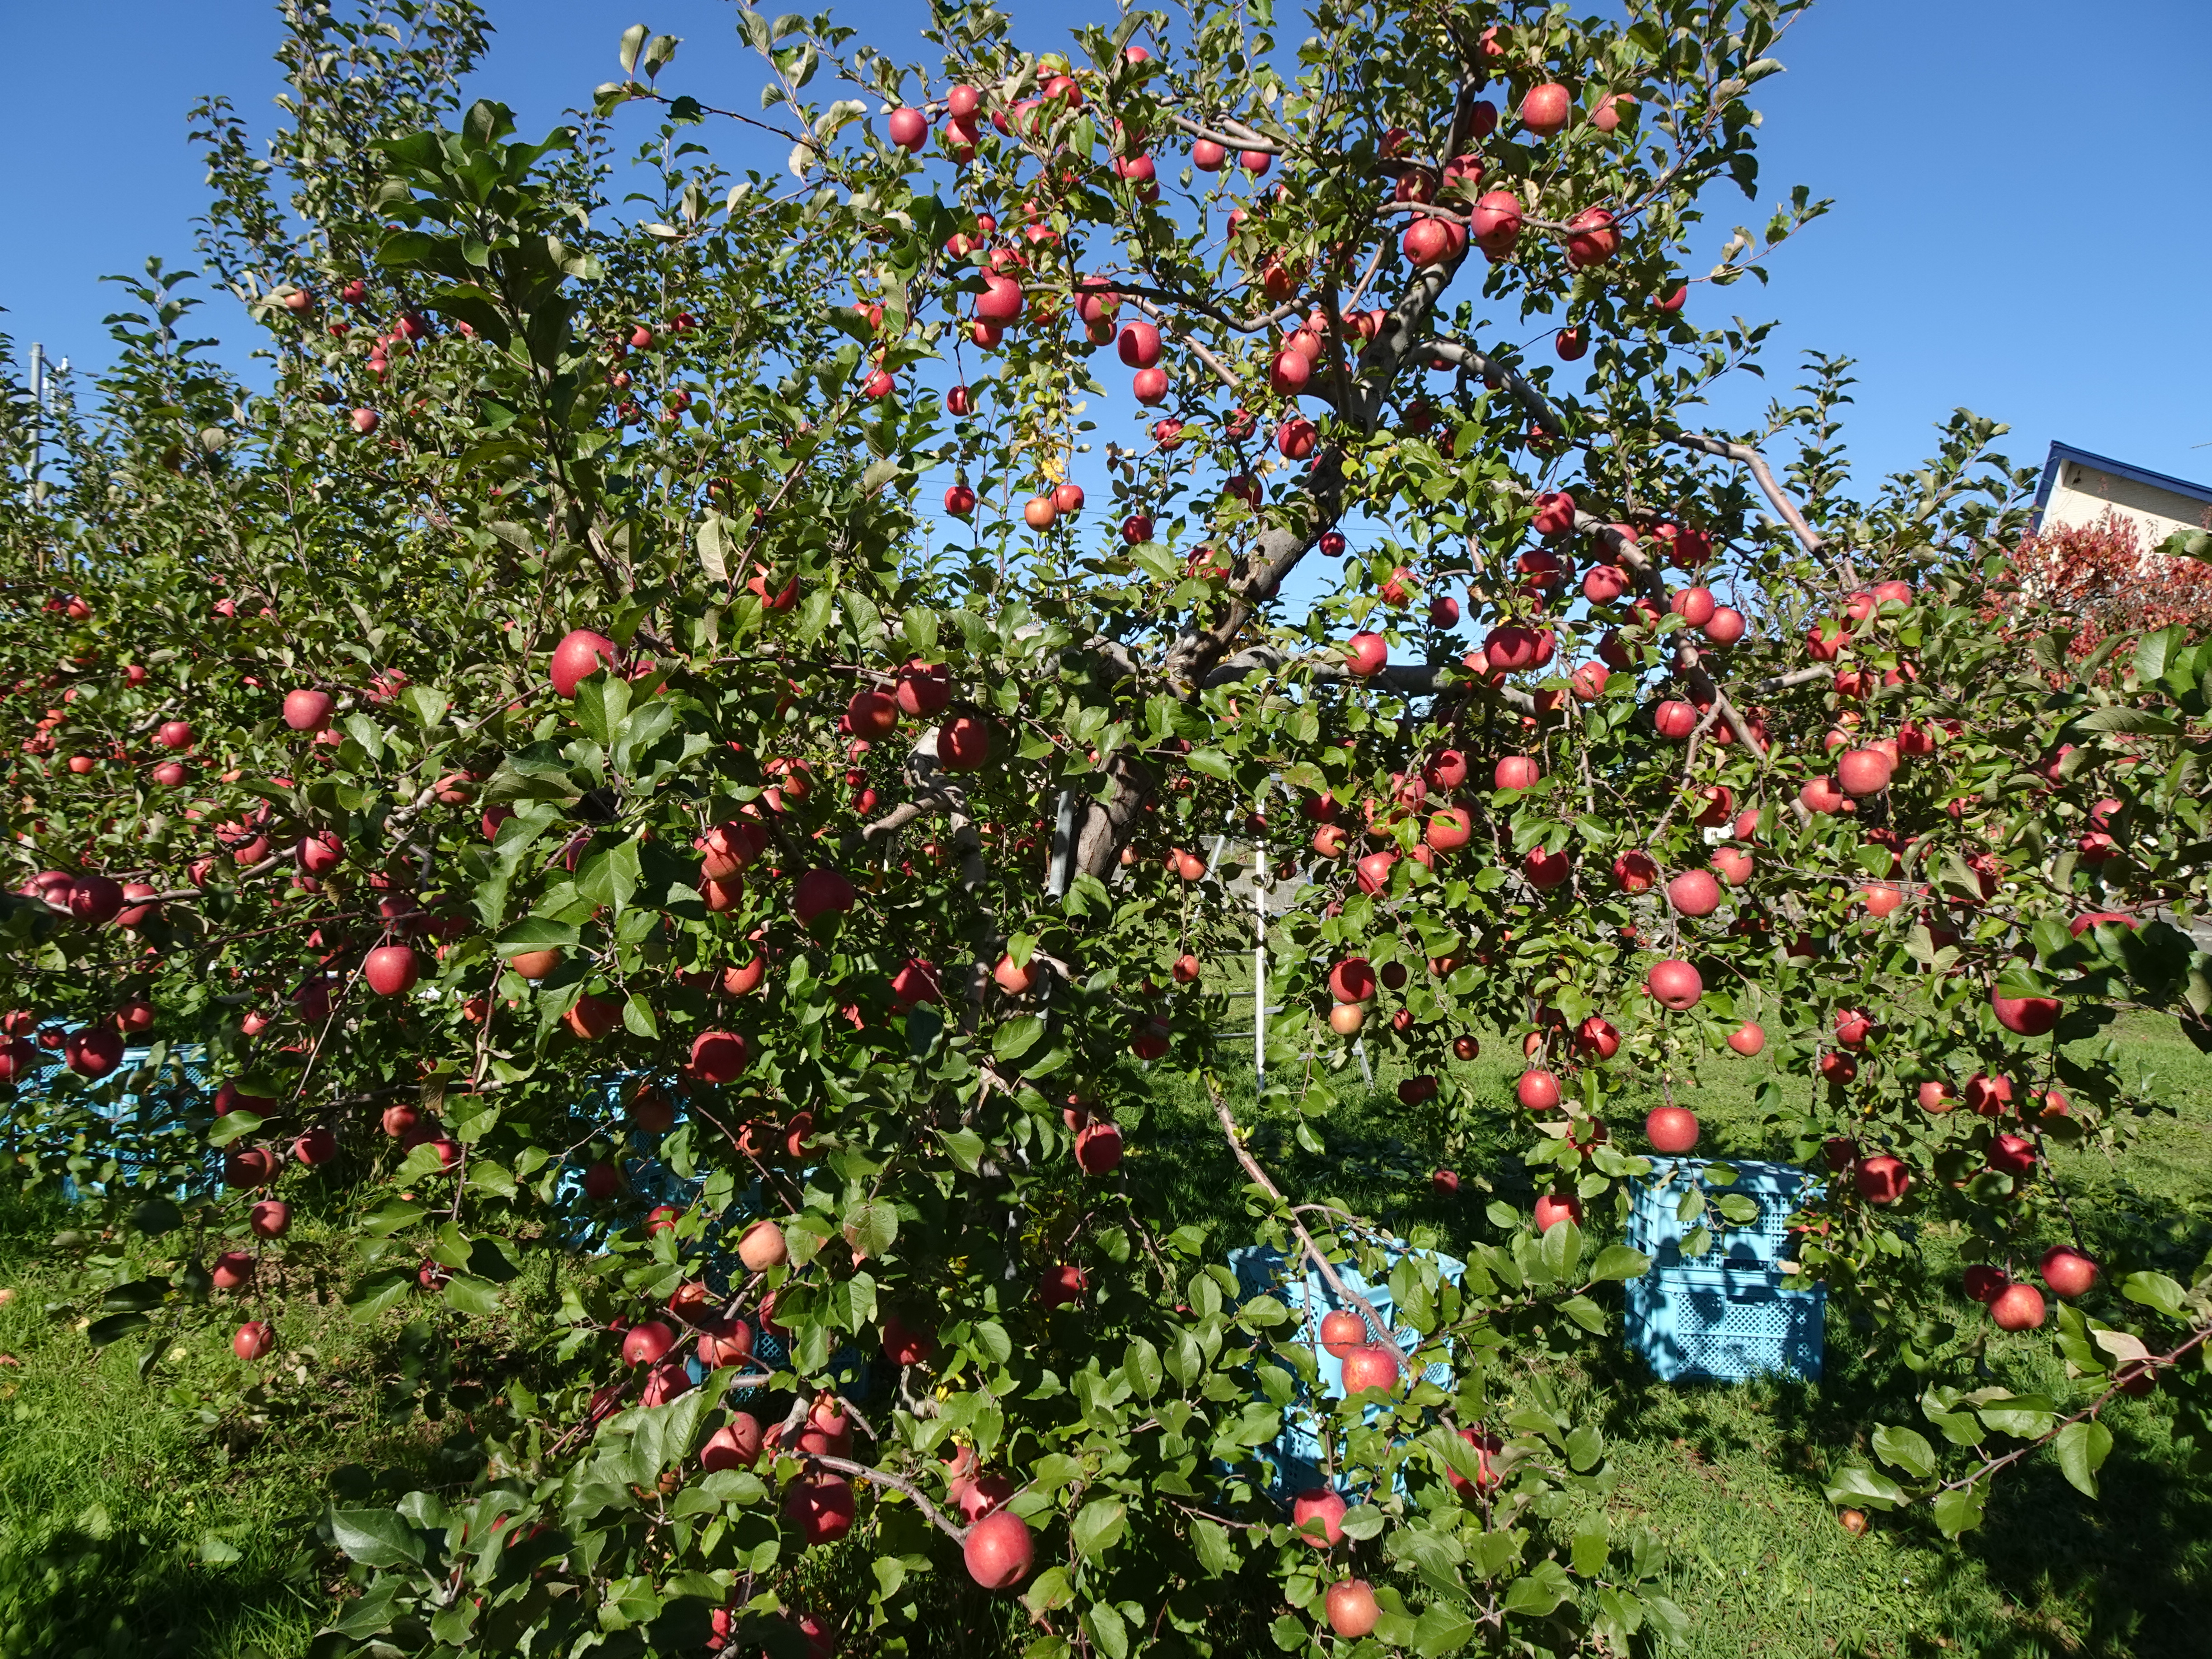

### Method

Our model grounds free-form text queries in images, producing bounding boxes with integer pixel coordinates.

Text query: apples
[1225,409,1256,440]
[1027,296,1060,327]
[462,1515,507,1547]
[234,1321,273,1360]
[773,678,803,714]
[1261,257,1302,301]
[1075,1124,1123,1175]
[637,1100,673,1134]
[279,1046,308,1056]
[292,876,321,918]
[1839,796,1855,815]
[1042,753,1052,766]
[1671,587,1715,628]
[1333,738,1356,748]
[945,486,975,515]
[1933,1166,1978,1187]
[1310,363,1321,374]
[1041,168,1080,206]
[567,838,590,873]
[422,894,470,939]
[1668,869,1719,917]
[509,1527,549,1576]
[1918,1080,1956,1115]
[1311,455,1322,473]
[867,224,889,243]
[1621,923,1637,938]
[1884,661,1916,687]
[1600,629,1644,668]
[1264,246,1286,260]
[1834,592,1878,635]
[2015,1089,2068,1133]
[747,561,799,615]
[1452,799,1477,822]
[1357,344,1368,358]
[1533,688,1564,716]
[1320,1310,1367,1359]
[1187,548,1230,583]
[1025,225,1060,259]
[416,1058,437,1080]
[589,1386,624,1429]
[24,871,78,918]
[2041,746,2075,789]
[1828,893,1851,920]
[761,1421,830,1473]
[1325,253,1355,281]
[250,1201,291,1239]
[224,1149,267,1189]
[2068,913,2140,975]
[383,1104,420,1137]
[900,860,913,877]
[937,718,988,773]
[1496,825,1513,847]
[378,896,416,935]
[2090,798,2131,834]
[116,884,161,930]
[1380,961,1407,990]
[1193,138,1225,172]
[69,875,124,924]
[738,1221,787,1273]
[1787,932,1820,959]
[1179,854,1207,881]
[117,1002,154,1033]
[1270,351,1310,395]
[762,757,812,804]
[1329,957,1376,1005]
[1884,844,1906,878]
[729,807,768,857]
[1484,627,1532,673]
[638,1364,691,1408]
[945,118,979,163]
[1087,750,1099,764]
[1651,523,1678,555]
[1640,984,1651,999]
[1304,791,1341,823]
[302,1037,317,1054]
[1126,46,1150,87]
[1430,360,1457,371]
[1277,184,1285,202]
[806,1395,850,1443]
[1341,1343,1398,1396]
[1379,128,1413,158]
[722,740,744,752]
[1476,952,1495,967]
[759,786,784,825]
[1613,850,1658,896]
[889,108,928,153]
[623,1321,675,1369]
[1806,625,1843,662]
[891,958,939,1005]
[994,954,1038,995]
[1991,983,2063,1036]
[810,827,828,839]
[1987,824,2005,838]
[1838,749,1891,797]
[1175,739,1191,759]
[1522,83,1570,136]
[296,1129,335,1165]
[895,658,953,719]
[1313,824,1349,859]
[1512,586,1543,620]
[852,789,878,816]
[700,1412,762,1474]
[1691,691,1712,715]
[1391,771,1427,815]
[1133,368,1168,405]
[1175,1305,1197,1317]
[1648,960,1702,1010]
[1613,564,1632,593]
[705,1570,743,1650]
[1495,756,1539,798]
[1822,1137,1861,1172]
[1706,712,1737,747]
[635,1467,679,1500]
[660,910,671,931]
[1964,1264,2006,1302]
[724,912,739,920]
[1836,1033,1868,1052]
[1041,76,1082,122]
[960,1475,1014,1527]
[1729,919,1751,938]
[300,1088,307,1095]
[1535,1004,1566,1032]
[1822,1052,1857,1085]
[1240,150,1271,177]
[1462,651,1506,692]
[1344,630,1387,677]
[1014,100,1054,137]
[1576,1018,1620,1062]
[185,798,220,834]
[1433,216,1466,261]
[992,99,1021,137]
[365,946,418,996]
[255,1147,279,1183]
[976,213,996,238]
[311,729,344,762]
[1172,955,1200,982]
[1593,524,1638,567]
[213,1252,254,1288]
[947,386,974,416]
[261,778,294,806]
[464,998,495,1024]
[1921,963,1957,981]
[215,1074,277,1120]
[963,1510,1034,1589]
[627,660,668,696]
[451,1563,468,1588]
[1522,624,1555,670]
[38,1028,67,1050]
[1834,662,1876,701]
[1593,91,1635,132]
[1864,827,1897,846]
[642,829,657,843]
[1624,599,1661,633]
[2031,784,2055,795]
[590,905,601,921]
[294,976,343,1023]
[1268,581,1280,597]
[1359,798,1400,839]
[1921,920,1955,955]
[1299,258,1313,278]
[1427,808,1471,854]
[510,949,561,980]
[1145,797,1157,812]
[65,1027,124,1079]
[1484,378,1501,389]
[1787,762,1803,778]
[1051,485,1084,514]
[1988,1284,2044,1332]
[1301,309,1328,349]
[852,303,878,317]
[1369,309,1388,337]
[1468,101,1497,139]
[1710,847,1753,887]
[735,1119,771,1157]
[594,990,645,1025]
[1114,152,1155,195]
[785,1472,855,1546]
[472,1596,482,1624]
[1173,776,1191,789]
[1325,1579,1380,1638]
[240,1010,270,1036]
[1406,401,1433,433]
[269,882,282,908]
[201,741,220,769]
[845,767,867,788]
[1863,931,1876,936]
[747,929,782,967]
[838,714,854,736]
[1453,1035,1479,1061]
[2040,1244,2097,1297]
[1024,497,1056,532]
[1566,251,1584,274]
[550,629,631,700]
[1834,1008,1872,1045]
[1525,845,1569,890]
[1940,718,1965,759]
[786,1112,827,1160]
[1520,716,1537,733]
[1689,784,1732,827]
[669,646,690,661]
[2113,736,2141,765]
[461,1079,483,1096]
[1131,1014,1171,1060]
[608,1315,630,1333]
[874,353,902,373]
[1393,1008,1415,1031]
[1284,328,1324,367]
[1156,419,1184,450]
[1447,1428,1504,1498]
[1583,565,1622,607]
[87,1020,95,1024]
[1015,836,1037,861]
[234,835,270,866]
[1227,238,1249,262]
[976,276,1023,329]
[1516,551,1560,589]
[848,692,899,742]
[1123,515,1153,545]
[1227,207,1266,240]
[1843,633,1853,646]
[1423,749,1467,792]
[1917,886,1931,919]
[498,994,519,1008]
[1864,738,1902,774]
[1326,901,1343,919]
[1897,719,1937,756]
[1117,322,1161,369]
[971,316,1003,350]
[103,1012,123,1033]
[1052,734,1064,745]
[1040,1266,1087,1312]
[436,769,475,805]
[1064,1094,1095,1134]
[981,249,1019,281]
[883,1316,934,1366]
[5,875,35,894]
[692,1031,747,1084]
[221,769,242,783]
[669,1281,710,1326]
[759,1290,790,1337]
[980,822,1005,848]
[308,928,353,971]
[1112,116,1146,151]
[1034,819,1046,832]
[1136,180,1160,204]
[419,1256,455,1290]
[676,965,713,994]
[1223,475,1263,513]
[1356,852,1397,900]
[1037,63,1062,91]
[1904,836,1932,860]
[866,665,902,709]
[1245,813,1267,835]
[283,689,334,732]
[1570,661,1610,703]
[1860,882,1902,918]
[1837,710,1861,727]
[1646,1107,1698,1153]
[1398,1079,1426,1107]
[1075,277,1120,325]
[1277,861,1296,881]
[1019,197,1047,225]
[1377,566,1419,608]
[1325,361,1352,375]
[1869,580,1912,607]
[1748,716,1763,743]
[1757,730,1774,754]
[368,668,413,710]
[1669,529,1712,570]
[216,813,255,843]
[1319,532,1345,557]
[1019,692,1030,703]
[1294,1488,1347,1548]
[153,761,187,789]
[496,693,525,723]
[1566,207,1621,267]
[436,944,452,961]
[1567,556,1576,579]
[1966,852,2008,908]
[819,1428,853,1473]
[1988,1134,2036,1170]
[920,843,948,867]
[1563,1044,1578,1072]
[1330,1004,1363,1035]
[1438,429,1455,460]
[627,1084,652,1114]
[1502,930,1513,951]
[1535,1194,1582,1233]
[1653,284,1686,312]
[473,772,492,782]
[1085,322,1117,346]
[869,307,883,330]
[1655,700,1696,738]
[0,1035,36,1084]
[1470,191,1522,247]
[1413,1075,1437,1097]
[1142,976,1160,999]
[1443,154,1486,203]
[1555,328,1588,361]
[1854,1155,1909,1203]
[1531,492,1575,536]
[1278,420,1316,460]
[256,804,301,847]
[1789,1212,1829,1237]
[847,739,870,763]
[1703,607,1745,647]
[1484,253,1510,264]
[482,806,517,842]
[2076,831,2116,864]
[585,1163,620,1199]
[431,1139,461,1177]
[887,978,908,1017]
[400,1193,416,1201]
[1734,809,1781,848]
[1163,848,1187,872]
[1824,730,1858,755]
[698,1318,753,1372]
[1672,646,1711,675]
[723,955,765,996]
[1013,250,1036,285]
[880,301,887,307]
[693,824,753,882]
[841,1002,865,1031]
[1057,144,1087,176]
[1433,1170,1458,1196]
[1565,1116,1607,1159]
[188,854,219,887]
[1429,955,1463,978]
[562,993,611,1041]
[1411,211,1425,219]
[947,232,984,261]
[1120,845,1138,866]
[1342,311,1375,344]
[1727,1020,1764,1057]
[1965,1072,2012,1117]
[1479,26,1519,67]
[1220,699,1241,722]
[1760,908,1771,931]
[1269,331,1290,357]
[1477,231,1519,256]
[864,369,895,402]
[766,867,783,878]
[646,1205,682,1241]
[1523,1030,1544,1060]
[698,873,744,912]
[677,1063,716,1097]
[1392,843,1434,888]
[1527,424,1556,458]
[948,86,982,124]
[296,831,344,874]
[938,1446,981,1504]
[1800,775,1842,815]
[136,946,164,973]
[794,868,855,927]
[1403,218,1447,269]
[5,1010,37,1036]
[763,1612,833,1659]
[1518,1069,1561,1110]
[369,851,410,892]
[1748,707,1771,718]
[160,722,194,749]
[1429,597,1459,629]
[1395,170,1434,205]
[1982,1167,2015,1202]
[1928,869,1979,911]
[1946,794,1977,818]
[1750,903,1764,909]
